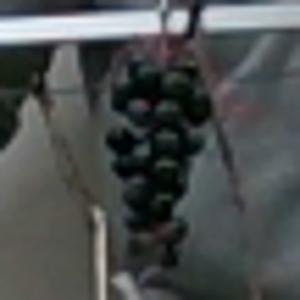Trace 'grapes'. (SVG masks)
<instances>
[{"instance_id":"grapes-1","label":"grapes","mask_w":300,"mask_h":300,"mask_svg":"<svg viewBox=\"0 0 300 300\" xmlns=\"http://www.w3.org/2000/svg\"><path fill=\"white\" fill-rule=\"evenodd\" d=\"M125 75L111 85L109 106L128 124L103 137L113 157L110 175L122 182L119 223L128 232L124 263L146 292L167 287L185 257L192 224L175 209L190 189L193 159L208 147L217 104L207 88L202 52L182 44L166 66L145 48L126 59Z\"/></svg>"}]
</instances>
